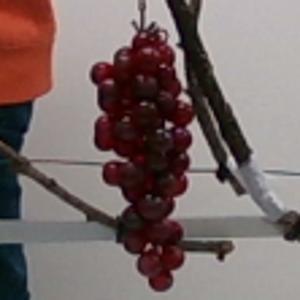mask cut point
Returning a JSON list of instances; mask_svg holds the SVG:
<instances>
[{
	"mask_svg": "<svg viewBox=\"0 0 300 300\" xmlns=\"http://www.w3.org/2000/svg\"><path fill=\"white\" fill-rule=\"evenodd\" d=\"M136 10L139 13V30L146 29V14L149 8V2L147 0H137L135 4Z\"/></svg>",
	"mask_w": 300,
	"mask_h": 300,
	"instance_id": "1",
	"label": "cut point"
}]
</instances>
